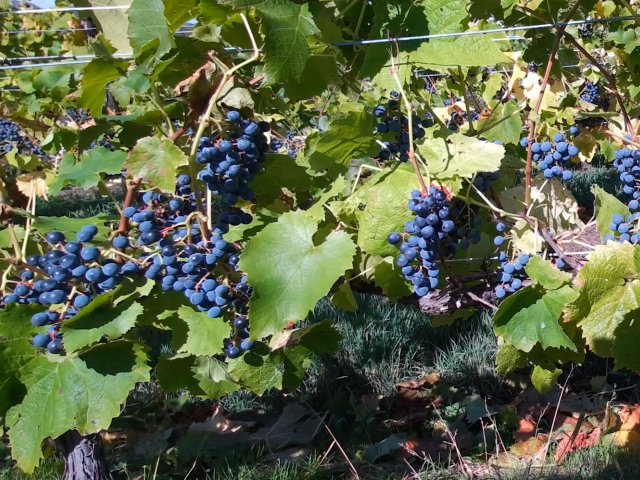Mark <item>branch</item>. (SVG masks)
Masks as SVG:
<instances>
[{"mask_svg":"<svg viewBox=\"0 0 640 480\" xmlns=\"http://www.w3.org/2000/svg\"><path fill=\"white\" fill-rule=\"evenodd\" d=\"M142 182H143V179L141 177H138V178L134 179L133 181H131L127 185L128 191H127V194L125 196V201L122 203V207L124 209H127L128 207H130L132 205V199H133V196L135 194V190H136L137 186H139Z\"/></svg>","mask_w":640,"mask_h":480,"instance_id":"obj_6","label":"branch"},{"mask_svg":"<svg viewBox=\"0 0 640 480\" xmlns=\"http://www.w3.org/2000/svg\"><path fill=\"white\" fill-rule=\"evenodd\" d=\"M554 31L557 33L556 38L553 41V45L551 47L549 56L544 63V70L542 72L541 81H540V89L536 95L533 112L538 114L541 110L542 100L547 92V84L549 79V74L551 71V65L553 64L557 52L559 50L560 44L563 38L570 43V45L579 53H581L586 59L591 63V65L606 79L610 86V90L613 94V99L622 114L623 119L625 120V125L627 128V132L632 138V140L636 143L638 147H640V138L636 133L633 123L630 120V114L620 96L619 89L617 88V84L610 73L596 60V58L587 51L585 47L581 44L577 43L576 39L572 37L569 33H567V27L564 28H554Z\"/></svg>","mask_w":640,"mask_h":480,"instance_id":"obj_1","label":"branch"},{"mask_svg":"<svg viewBox=\"0 0 640 480\" xmlns=\"http://www.w3.org/2000/svg\"><path fill=\"white\" fill-rule=\"evenodd\" d=\"M258 59H259V56L257 54H253L243 60H239L233 66H231L225 72V74L221 77L218 84L215 86V89L209 100L208 108L199 122V126L193 135V138L191 140L190 146L187 151V168H188V173L190 177L191 188H192V191L195 193L194 201L198 210L197 211L198 227L203 233L202 240L204 242H208L210 240V231L208 230V227L205 225L209 220V216L206 214V210L204 208V204L200 196L201 192L199 191V185L197 182V175H196L195 165H194V161H195L194 154L198 146V142L201 138V135L204 133V130L209 121V118L213 115V112L216 107V102L225 84L228 82V80L231 78V76L235 72H237L242 67L248 66L249 64L257 61Z\"/></svg>","mask_w":640,"mask_h":480,"instance_id":"obj_2","label":"branch"},{"mask_svg":"<svg viewBox=\"0 0 640 480\" xmlns=\"http://www.w3.org/2000/svg\"><path fill=\"white\" fill-rule=\"evenodd\" d=\"M389 67L390 70L393 73V76L395 78L396 81V86H397V90L399 92L401 101L403 102V105L405 106L406 109V113H407V121H408V134H409V146H410V152H409V164L412 166L413 171L415 172L416 176H417V182L419 183L421 190L423 192L424 195L428 194V190L426 188L425 182L423 180V176L419 170V168L417 167L416 161H417V156L414 154L415 152V143H414V134L412 133V122H411V117H412V111H411V107L410 104L406 98V95L404 93L403 87H402V83H401V79L399 77L398 74V70L396 69L395 65H394V61L390 60L389 61Z\"/></svg>","mask_w":640,"mask_h":480,"instance_id":"obj_3","label":"branch"},{"mask_svg":"<svg viewBox=\"0 0 640 480\" xmlns=\"http://www.w3.org/2000/svg\"><path fill=\"white\" fill-rule=\"evenodd\" d=\"M515 7L519 10H522L528 14H531L533 16H535L538 20H540L541 22L547 24V23H553V20L551 18H548L547 16H545L543 13H541L540 11H538L536 8L531 7L525 3H521V2H517L515 4Z\"/></svg>","mask_w":640,"mask_h":480,"instance_id":"obj_5","label":"branch"},{"mask_svg":"<svg viewBox=\"0 0 640 480\" xmlns=\"http://www.w3.org/2000/svg\"><path fill=\"white\" fill-rule=\"evenodd\" d=\"M584 4H585V1H584V0H578V1L574 4V6H572V7L570 8V10L566 13V15H564V16L562 17V20H563L564 22H565V21H568V20H571V18L573 17V15H574V14H575V13H576V12H577V11H578V10H579L583 5H584Z\"/></svg>","mask_w":640,"mask_h":480,"instance_id":"obj_7","label":"branch"},{"mask_svg":"<svg viewBox=\"0 0 640 480\" xmlns=\"http://www.w3.org/2000/svg\"><path fill=\"white\" fill-rule=\"evenodd\" d=\"M533 153L528 151L526 153V158L524 161V169H525V191H524V201L526 202L524 207V213L528 214L529 209L532 202V164H533Z\"/></svg>","mask_w":640,"mask_h":480,"instance_id":"obj_4","label":"branch"}]
</instances>
